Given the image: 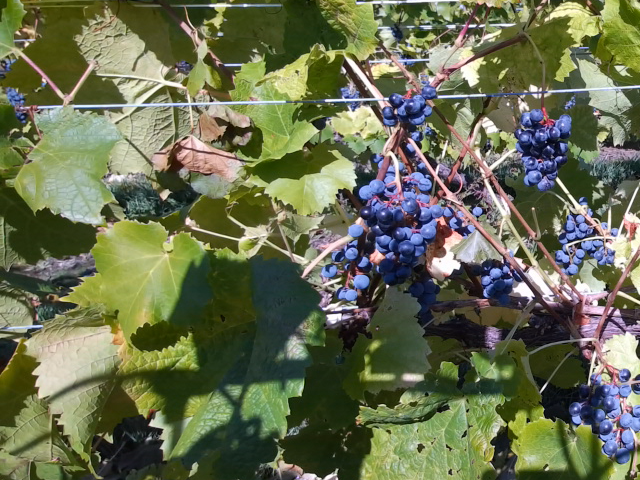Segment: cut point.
Returning a JSON list of instances; mask_svg holds the SVG:
<instances>
[{
    "label": "cut point",
    "mask_w": 640,
    "mask_h": 480,
    "mask_svg": "<svg viewBox=\"0 0 640 480\" xmlns=\"http://www.w3.org/2000/svg\"><path fill=\"white\" fill-rule=\"evenodd\" d=\"M526 39H527L528 43L533 47V50L537 55L538 62H539V67H540L541 79L545 80L546 79V71H545V65H544V60H543V56H542L541 50L538 48V45L535 43V41L533 40V38L531 37V35L529 33H528V37Z\"/></svg>",
    "instance_id": "1"
},
{
    "label": "cut point",
    "mask_w": 640,
    "mask_h": 480,
    "mask_svg": "<svg viewBox=\"0 0 640 480\" xmlns=\"http://www.w3.org/2000/svg\"><path fill=\"white\" fill-rule=\"evenodd\" d=\"M391 158H392L393 166L395 168V176L399 177L400 176V165L398 163L397 156H396L395 152L392 153V157Z\"/></svg>",
    "instance_id": "2"
}]
</instances>
